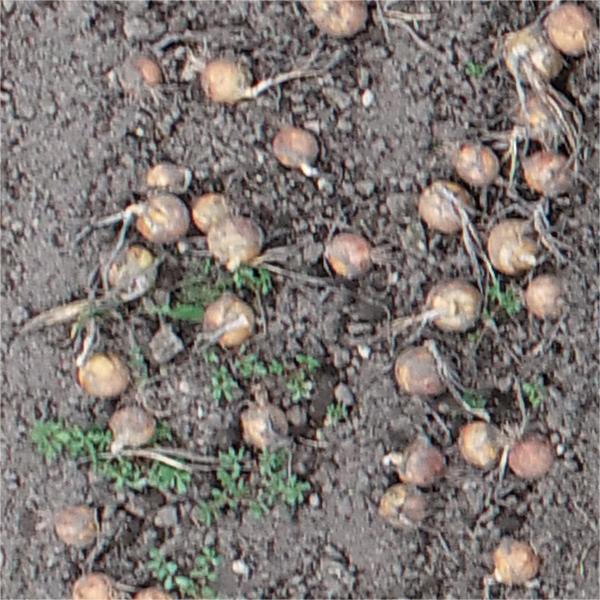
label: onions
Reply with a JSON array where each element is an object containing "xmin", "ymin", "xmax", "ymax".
[
  {"xmin": 522, "ymin": 273, "xmax": 565, "ymax": 318},
  {"xmin": 488, "ymin": 220, "xmax": 539, "ymax": 272},
  {"xmin": 138, "ymin": 192, "xmax": 190, "ymax": 240},
  {"xmin": 376, "ymin": 483, "xmax": 425, "ymax": 524},
  {"xmin": 418, "ymin": 181, "xmax": 469, "ymax": 234},
  {"xmin": 456, "ymin": 421, "xmax": 501, "ymax": 466},
  {"xmin": 78, "ymin": 352, "xmax": 126, "ymax": 397},
  {"xmin": 507, "ymin": 435, "xmax": 553, "ymax": 479},
  {"xmin": 272, "ymin": 127, "xmax": 318, "ymax": 172},
  {"xmin": 191, "ymin": 192, "xmax": 228, "ymax": 232},
  {"xmin": 488, "ymin": 538, "xmax": 539, "ymax": 584},
  {"xmin": 401, "ymin": 442, "xmax": 443, "ymax": 486},
  {"xmin": 203, "ymin": 55, "xmax": 250, "ymax": 103},
  {"xmin": 110, "ymin": 403, "xmax": 155, "ymax": 449},
  {"xmin": 543, "ymin": 4, "xmax": 593, "ymax": 58},
  {"xmin": 393, "ymin": 344, "xmax": 446, "ymax": 396},
  {"xmin": 499, "ymin": 21, "xmax": 566, "ymax": 82},
  {"xmin": 71, "ymin": 573, "xmax": 112, "ymax": 599},
  {"xmin": 322, "ymin": 231, "xmax": 372, "ymax": 277},
  {"xmin": 134, "ymin": 583, "xmax": 169, "ymax": 599},
  {"xmin": 427, "ymin": 280, "xmax": 479, "ymax": 331},
  {"xmin": 520, "ymin": 93, "xmax": 568, "ymax": 142},
  {"xmin": 206, "ymin": 214, "xmax": 261, "ymax": 266},
  {"xmin": 304, "ymin": 0, "xmax": 363, "ymax": 35},
  {"xmin": 201, "ymin": 296, "xmax": 254, "ymax": 346},
  {"xmin": 103, "ymin": 246, "xmax": 153, "ymax": 292},
  {"xmin": 523, "ymin": 148, "xmax": 572, "ymax": 194},
  {"xmin": 454, "ymin": 143, "xmax": 497, "ymax": 185},
  {"xmin": 146, "ymin": 160, "xmax": 186, "ymax": 193},
  {"xmin": 54, "ymin": 505, "xmax": 97, "ymax": 550},
  {"xmin": 240, "ymin": 402, "xmax": 288, "ymax": 448},
  {"xmin": 126, "ymin": 53, "xmax": 164, "ymax": 90}
]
